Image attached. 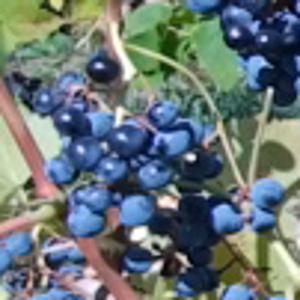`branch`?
Returning a JSON list of instances; mask_svg holds the SVG:
<instances>
[{
    "mask_svg": "<svg viewBox=\"0 0 300 300\" xmlns=\"http://www.w3.org/2000/svg\"><path fill=\"white\" fill-rule=\"evenodd\" d=\"M106 5V20L107 25L119 24V32H126V21L123 10L124 0H104Z\"/></svg>",
    "mask_w": 300,
    "mask_h": 300,
    "instance_id": "3",
    "label": "branch"
},
{
    "mask_svg": "<svg viewBox=\"0 0 300 300\" xmlns=\"http://www.w3.org/2000/svg\"><path fill=\"white\" fill-rule=\"evenodd\" d=\"M0 110L7 130L24 154L26 166L32 172V180L37 188L38 199L52 203L61 198L63 190L47 179L45 161L24 122L20 104L4 79H0Z\"/></svg>",
    "mask_w": 300,
    "mask_h": 300,
    "instance_id": "1",
    "label": "branch"
},
{
    "mask_svg": "<svg viewBox=\"0 0 300 300\" xmlns=\"http://www.w3.org/2000/svg\"><path fill=\"white\" fill-rule=\"evenodd\" d=\"M77 249L82 253L85 262L96 271L100 283L110 289L115 299L142 300L141 294L117 276L114 270L108 266L106 259L99 252L98 243L94 239L85 238L79 241Z\"/></svg>",
    "mask_w": 300,
    "mask_h": 300,
    "instance_id": "2",
    "label": "branch"
}]
</instances>
